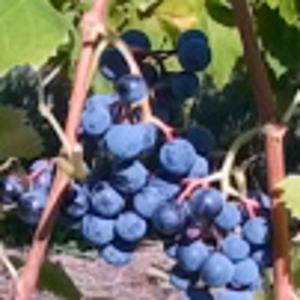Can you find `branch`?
Masks as SVG:
<instances>
[{
  "label": "branch",
  "mask_w": 300,
  "mask_h": 300,
  "mask_svg": "<svg viewBox=\"0 0 300 300\" xmlns=\"http://www.w3.org/2000/svg\"><path fill=\"white\" fill-rule=\"evenodd\" d=\"M241 32L244 57L248 65L264 133L266 151L265 185L268 187L270 206L274 209V293L273 300H296L291 280V226L289 212L281 201L284 193L282 181L286 178L285 138L289 126L282 123L269 78L260 59L253 25L245 0H232Z\"/></svg>",
  "instance_id": "branch-1"
},
{
  "label": "branch",
  "mask_w": 300,
  "mask_h": 300,
  "mask_svg": "<svg viewBox=\"0 0 300 300\" xmlns=\"http://www.w3.org/2000/svg\"><path fill=\"white\" fill-rule=\"evenodd\" d=\"M104 12L105 0H94L91 15H85L81 19L79 34V39L82 41L81 58L78 62L70 94V106L64 134L58 143L57 158L53 166L54 173L48 199L37 220L32 245L29 248V256L14 288L15 300H34L37 297L57 210L65 190L71 186V171L78 136L77 122L89 88L92 47L101 27Z\"/></svg>",
  "instance_id": "branch-2"
}]
</instances>
